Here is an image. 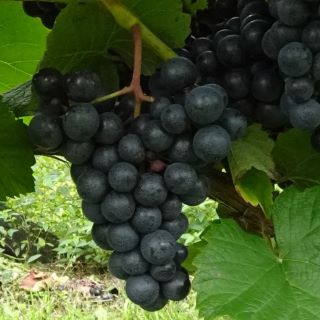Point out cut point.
Instances as JSON below:
<instances>
[{
    "label": "cut point",
    "instance_id": "1",
    "mask_svg": "<svg viewBox=\"0 0 320 320\" xmlns=\"http://www.w3.org/2000/svg\"><path fill=\"white\" fill-rule=\"evenodd\" d=\"M139 24H134L131 26L130 32L133 34L134 39V70L133 78L130 86H126L122 90L117 92L98 97L89 102V104H95L98 102H105L113 97L121 96L127 93H132L135 101L134 115L129 119L124 120V125L134 121L140 115L141 103L143 101L155 102L156 98L153 95H144L140 86V76H141V62H142V34Z\"/></svg>",
    "mask_w": 320,
    "mask_h": 320
}]
</instances>
